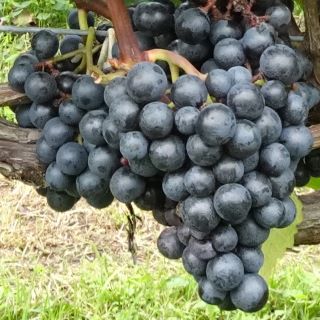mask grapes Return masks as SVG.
Wrapping results in <instances>:
<instances>
[{"mask_svg": "<svg viewBox=\"0 0 320 320\" xmlns=\"http://www.w3.org/2000/svg\"><path fill=\"white\" fill-rule=\"evenodd\" d=\"M185 0H135L127 8L143 50L166 49L185 57L205 80L180 76L172 84L167 61H142L127 77L95 84L86 65L65 58L48 65L57 35L40 30L32 51L19 55L10 85L32 103L15 105L18 126L42 130L36 156L49 164L46 188H36L57 212L83 196L94 208L114 197L153 211L166 225L157 248L182 257L199 283L200 298L226 311L257 312L268 286L257 273L261 244L273 228L296 217L295 186L320 177V148L309 126L320 124V90L305 83L312 62L278 37L290 22L292 0H255L260 25L212 21Z\"/></svg>", "mask_w": 320, "mask_h": 320, "instance_id": "1", "label": "grapes"}, {"mask_svg": "<svg viewBox=\"0 0 320 320\" xmlns=\"http://www.w3.org/2000/svg\"><path fill=\"white\" fill-rule=\"evenodd\" d=\"M79 43L83 44V38L79 36L69 35L63 38L60 49L62 55L67 52L77 51Z\"/></svg>", "mask_w": 320, "mask_h": 320, "instance_id": "2", "label": "grapes"}, {"mask_svg": "<svg viewBox=\"0 0 320 320\" xmlns=\"http://www.w3.org/2000/svg\"><path fill=\"white\" fill-rule=\"evenodd\" d=\"M67 20H68L69 28H71V29H80L79 19H78V10L77 9L72 10L69 13V15L67 17Z\"/></svg>", "mask_w": 320, "mask_h": 320, "instance_id": "3", "label": "grapes"}, {"mask_svg": "<svg viewBox=\"0 0 320 320\" xmlns=\"http://www.w3.org/2000/svg\"><path fill=\"white\" fill-rule=\"evenodd\" d=\"M229 4V0H216L215 6L221 11L222 14L227 12L226 6Z\"/></svg>", "mask_w": 320, "mask_h": 320, "instance_id": "4", "label": "grapes"}, {"mask_svg": "<svg viewBox=\"0 0 320 320\" xmlns=\"http://www.w3.org/2000/svg\"><path fill=\"white\" fill-rule=\"evenodd\" d=\"M118 49H119V46H118V42H114L113 45H112V57L113 59L114 58H117L118 56Z\"/></svg>", "mask_w": 320, "mask_h": 320, "instance_id": "5", "label": "grapes"}, {"mask_svg": "<svg viewBox=\"0 0 320 320\" xmlns=\"http://www.w3.org/2000/svg\"><path fill=\"white\" fill-rule=\"evenodd\" d=\"M87 21H88V29L90 27H94V18L93 15L89 12H87Z\"/></svg>", "mask_w": 320, "mask_h": 320, "instance_id": "6", "label": "grapes"}, {"mask_svg": "<svg viewBox=\"0 0 320 320\" xmlns=\"http://www.w3.org/2000/svg\"><path fill=\"white\" fill-rule=\"evenodd\" d=\"M101 48L102 46H100L97 50V52L95 54H93V65L96 66L97 62H98V59H99V56H100V53H101Z\"/></svg>", "mask_w": 320, "mask_h": 320, "instance_id": "7", "label": "grapes"}, {"mask_svg": "<svg viewBox=\"0 0 320 320\" xmlns=\"http://www.w3.org/2000/svg\"><path fill=\"white\" fill-rule=\"evenodd\" d=\"M108 28H114L113 25H109V24H101L97 27V30H108Z\"/></svg>", "mask_w": 320, "mask_h": 320, "instance_id": "8", "label": "grapes"}, {"mask_svg": "<svg viewBox=\"0 0 320 320\" xmlns=\"http://www.w3.org/2000/svg\"><path fill=\"white\" fill-rule=\"evenodd\" d=\"M96 39L103 44L104 40H105V36H100V35H95Z\"/></svg>", "mask_w": 320, "mask_h": 320, "instance_id": "9", "label": "grapes"}]
</instances>
